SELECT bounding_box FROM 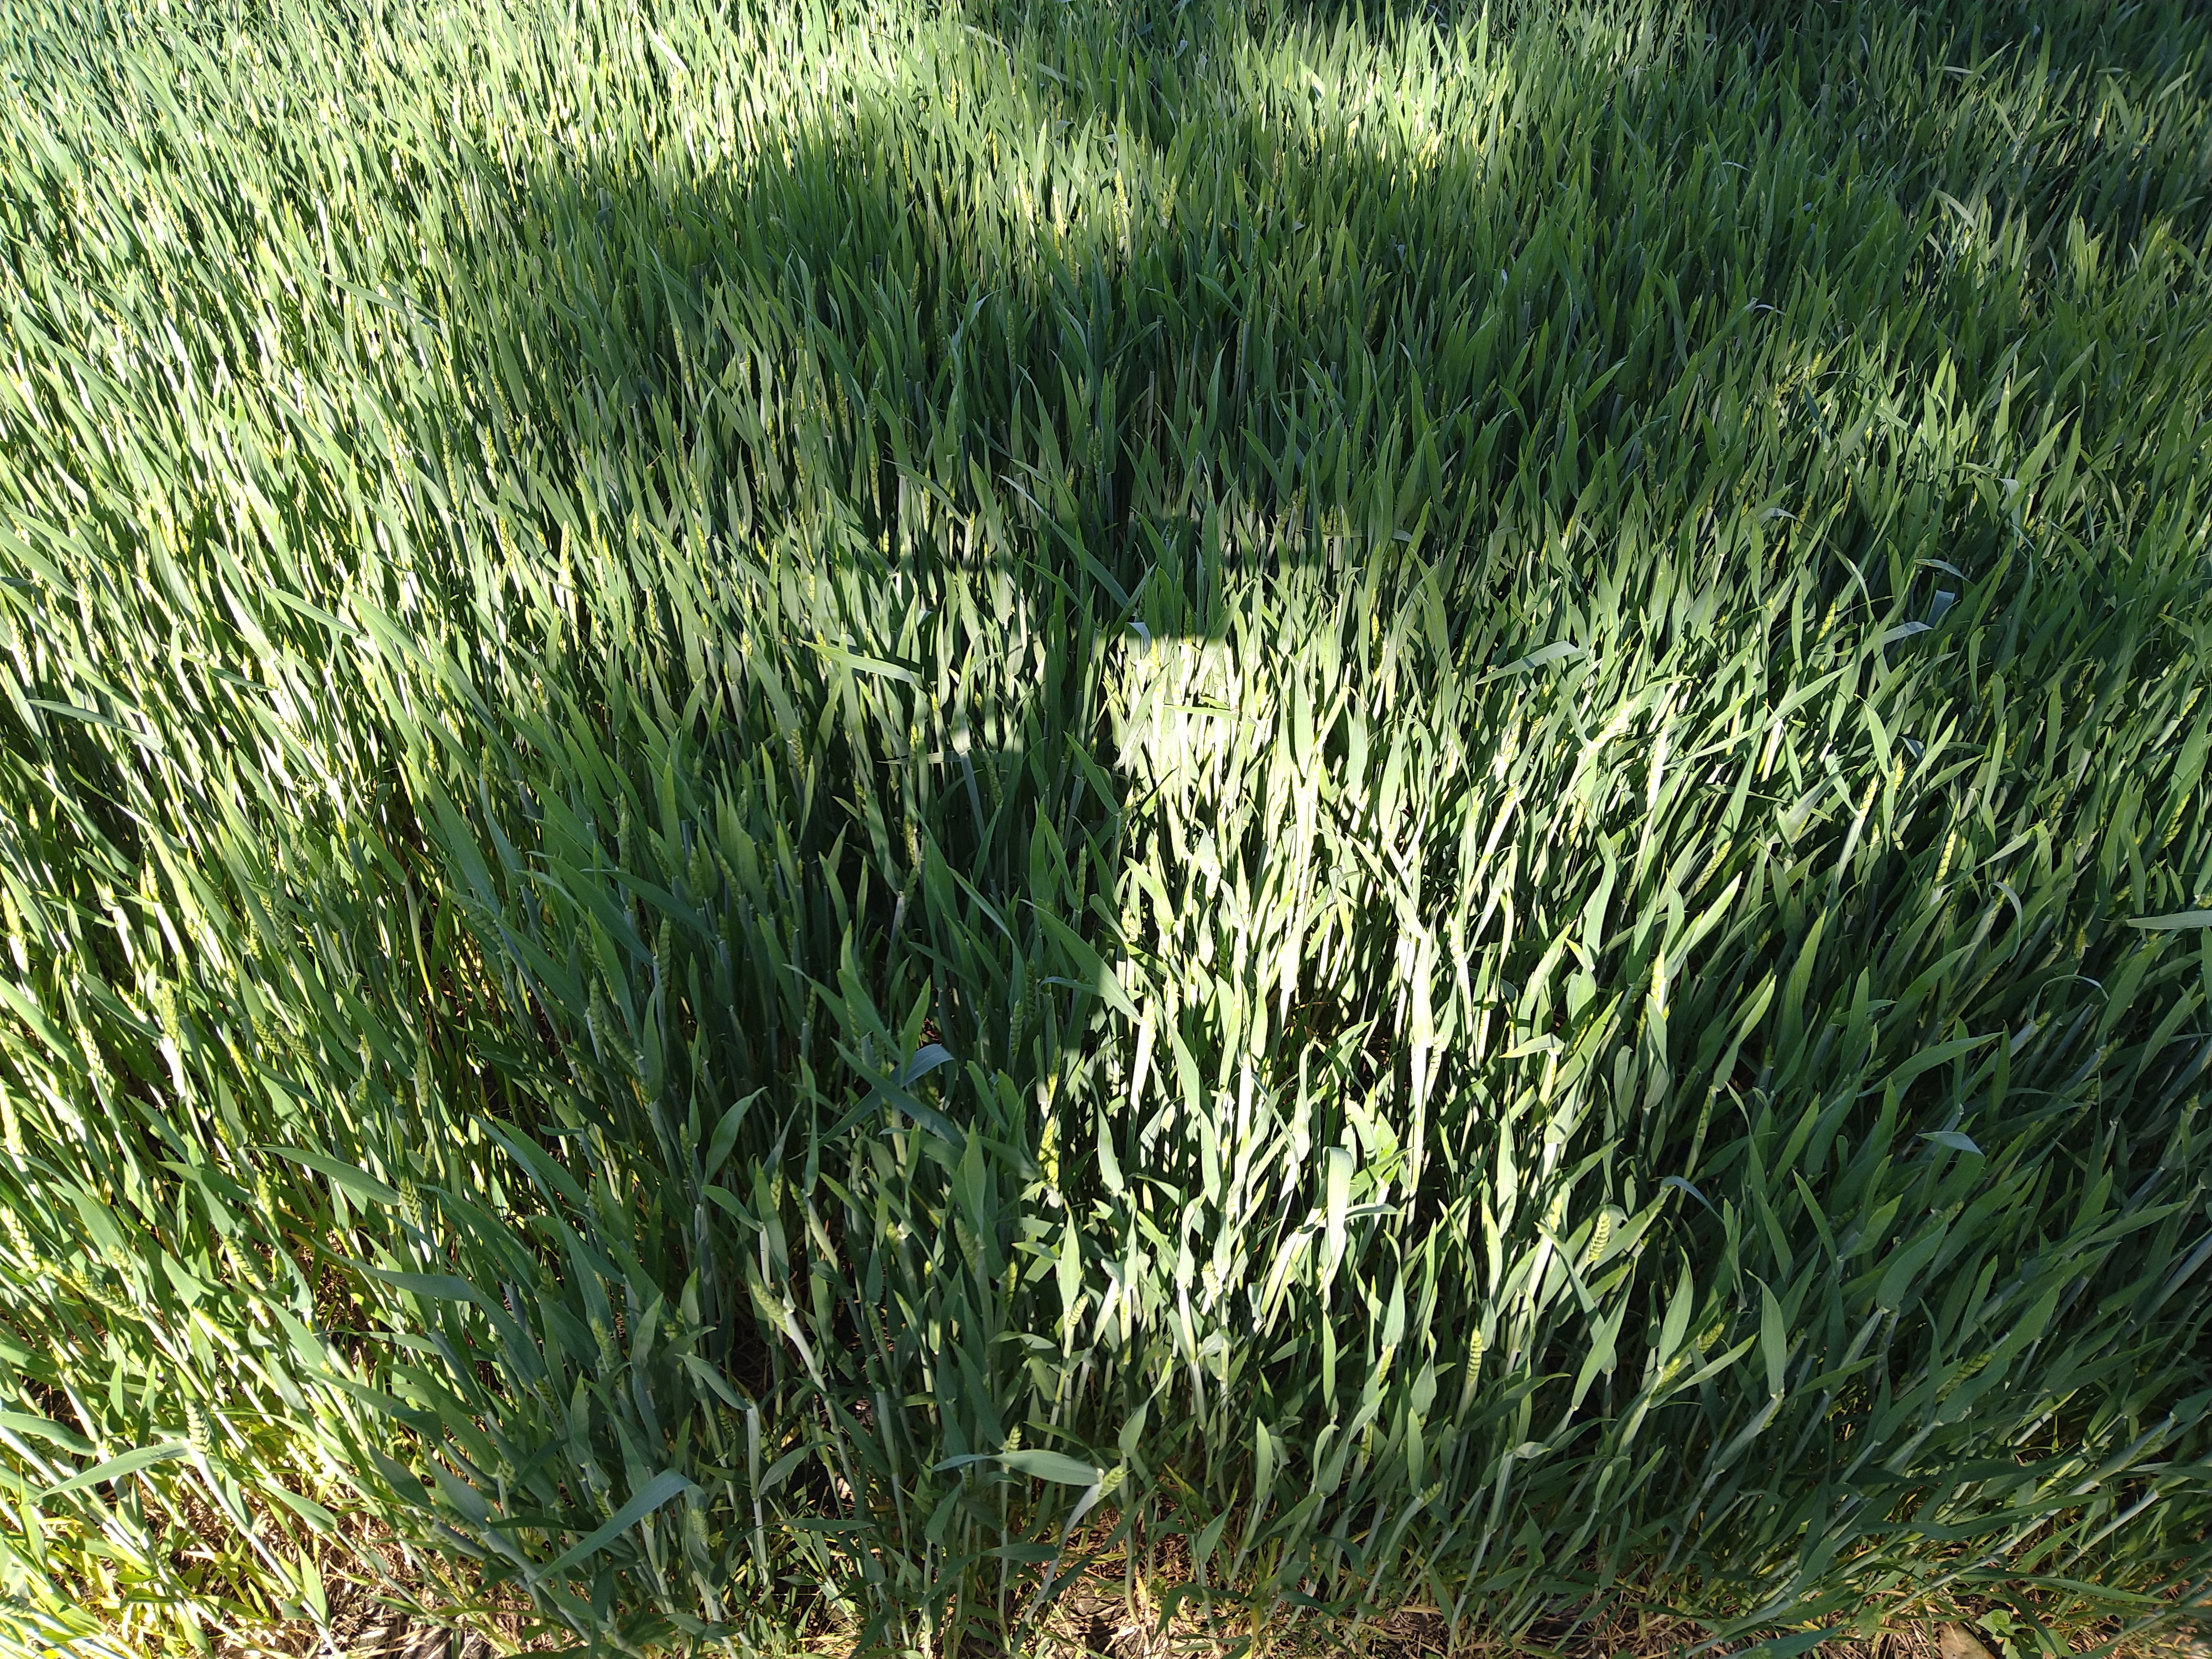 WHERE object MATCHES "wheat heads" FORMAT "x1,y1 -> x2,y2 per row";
1371,612 -> 1383,671
593,1489 -> 615,1523
1247,283 -> 1254,324
164,200 -> 189,247
1170,332 -> 1177,366
803,984 -> 816,1030
554,113 -> 561,125
24,795 -> 42,845
1731,296 -> 1736,308
729,580 -> 740,600
1203,34 -> 1209,51
2029,1120 -> 2036,1130
323,736 -> 337,779
792,730 -> 805,782
299,1433 -> 314,1452
703,570 -> 711,596
1740,495 -> 1754,518
2133,129 -> 2152,154
1080,289 -> 1084,303
634,283 -> 644,310
1591,695 -> 1639,754
557,635 -> 565,662
1314,1266 -> 1325,1306
264,449 -> 273,465
953,1217 -> 978,1277
1121,904 -> 1130,931
1640,1225 -> 1660,1245
1307,124 -> 1315,153
1719,108 -> 1728,136
1054,225 -> 1060,261
1515,192 -> 1520,208
1486,90 -> 1494,106
1201,510 -> 1207,564
266,840 -> 275,873
1567,804 -> 1582,847
254,215 -> 265,239
718,1406 -> 734,1440
590,513 -> 599,547
1056,101 -> 1063,121
1842,478 -> 1853,515
1393,395 -> 1405,415
483,963 -> 506,1001
63,425 -> 72,438
494,563 -> 502,591
333,857 -> 344,898
1419,1482 -> 1441,1506
2,888 -> 27,955
1953,523 -> 1973,556
807,545 -> 814,566
907,823 -> 919,863
1473,123 -> 1477,142
358,474 -> 367,490
1319,676 -> 1323,717
1438,478 -> 1452,503
1646,443 -> 1657,495
823,271 -> 832,294
250,99 -> 262,128
1772,367 -> 1802,405
259,894 -> 273,920
690,469 -> 703,506
436,682 -> 457,732
1503,711 -> 1524,766
315,653 -> 324,673
1275,793 -> 1289,823
2145,928 -> 2161,942
571,1039 -> 588,1085
480,746 -> 491,785
1872,797 -> 1887,845
679,230 -> 686,246
162,273 -> 171,308
30,535 -> 44,554
1362,1425 -> 1370,1465
592,943 -> 613,993
1277,147 -> 1283,178
2024,1011 -> 2049,1042
1461,1170 -> 1472,1194
1312,756 -> 1324,789
1937,829 -> 1952,883
1446,78 -> 1449,92
752,1281 -> 788,1333
136,547 -> 150,589
866,365 -> 884,427
395,1080 -> 406,1116
492,126 -> 503,146
408,222 -> 416,250
359,1034 -> 371,1062
1974,690 -> 1996,741
876,1062 -> 891,1125
757,539 -> 766,561
1119,791 -> 1135,838
1589,104 -> 1592,116
1442,204 -> 1451,254
1922,1201 -> 1965,1239
990,270 -> 998,292
320,867 -> 341,916
1255,386 -> 1259,399
255,1172 -> 276,1227
294,327 -> 303,367
900,542 -> 906,562
1012,77 -> 1017,95
1972,671 -> 1998,711
1759,273 -> 1765,289
696,524 -> 709,558
1881,1309 -> 1895,1339
184,327 -> 191,349
56,87 -> 66,115
2180,691 -> 2199,715
629,624 -> 635,648
690,757 -> 702,800
1201,348 -> 1211,381
814,376 -> 823,392
544,213 -> 550,230
492,372 -> 501,392
599,431 -> 615,458
984,542 -> 988,556
399,32 -> 408,55
510,102 -> 525,137
611,597 -> 622,623
1648,371 -> 1652,387
1507,243 -> 1514,256
832,370 -> 850,427
1507,1021 -> 1515,1050
1543,394 -> 1559,438
437,285 -> 448,327
921,340 -> 925,367
2073,835 -> 2081,850
1236,318 -> 1244,369
8,616 -> 34,680
1044,280 -> 1052,297
364,42 -> 374,74
320,1361 -> 347,1402
486,428 -> 494,467
1682,0 -> 1690,15
100,301 -> 129,335
1129,264 -> 1135,282
985,391 -> 1003,442
1736,467 -> 1751,495
1218,941 -> 1228,977
1297,207 -> 1305,222
644,1509 -> 653,1527
276,1020 -> 313,1063
924,1068 -> 940,1094
348,183 -> 361,226
649,836 -> 675,893
620,792 -> 626,820
1695,1087 -> 1717,1140
546,102 -> 557,134
1082,435 -> 1094,479
627,887 -> 640,931
728,105 -> 736,143
871,1030 -> 883,1072
1217,562 -> 1223,581
195,1306 -> 231,1345
59,192 -> 69,211
818,631 -> 830,666
836,553 -> 841,577
1038,1115 -> 1056,1166
1664,118 -> 1671,146
1432,299 -> 1436,313
95,638 -> 131,687
691,1509 -> 709,1541
138,701 -> 151,725
1821,1007 -> 1842,1036
1762,1042 -> 1774,1068
982,749 -> 1003,806
679,1121 -> 694,1171
1137,582 -> 1148,624
1807,350 -> 1822,380
778,206 -> 789,245
1061,730 -> 1076,769
815,229 -> 823,255
1291,764 -> 1303,822
657,1312 -> 679,1342
310,1012 -> 319,1037
924,468 -> 929,518
1057,798 -> 1066,842
660,547 -> 666,565
2010,162 -> 2018,185
1100,110 -> 1108,132
265,669 -> 287,701
1785,250 -> 1802,304
1516,201 -> 1531,240
2106,209 -> 2116,232
531,867 -> 546,901
253,1011 -> 276,1052
127,778 -> 159,824
1560,385 -> 1567,420
127,82 -> 139,108
128,122 -> 138,146
793,448 -> 806,485
935,226 -> 941,251
1094,429 -> 1105,487
1841,1058 -> 1885,1092
109,1244 -> 137,1287
385,420 -> 403,483
983,1375 -> 992,1401
557,257 -> 575,309
1048,1045 -> 1060,1096
1131,916 -> 1137,948
397,1173 -> 419,1224
865,1306 -> 880,1340
1027,959 -> 1037,1021
937,170 -> 945,200
692,177 -> 697,196
1741,403 -> 1753,428
1642,404 -> 1652,428
1238,164 -> 1242,176
103,1435 -> 117,1458
1721,512 -> 1729,532
313,892 -> 327,924
1419,129 -> 1436,161
1767,818 -> 1779,841
1708,486 -> 1715,509
721,560 -> 730,577
1563,515 -> 1574,542
573,476 -> 584,494
1252,232 -> 1259,277
249,560 -> 258,584
869,269 -> 878,298
297,493 -> 307,515
1077,846 -> 1085,913
738,521 -> 744,541
1324,503 -> 1333,535
536,684 -> 546,700
557,520 -> 569,578
717,323 -> 722,349
111,168 -> 129,207
1686,213 -> 1690,239
500,393 -> 516,456
1893,339 -> 1902,362
1201,1262 -> 1219,1300
301,798 -> 310,831
1220,1134 -> 1231,1190
445,889 -> 506,951
1551,1061 -> 1557,1083
1005,1260 -> 1017,1306
2018,515 -> 2034,547
781,637 -> 793,667
1334,510 -> 1338,530
1693,839 -> 1731,895
318,524 -> 335,561
1199,317 -> 1206,329
1277,489 -> 1297,528
949,489 -> 956,529
882,528 -> 889,555
777,276 -> 784,301
846,1000 -> 862,1056
1121,1298 -> 1130,1326
2171,263 -> 2174,278
1784,433 -> 1791,449
1635,1004 -> 1649,1045
617,738 -> 624,766
502,953 -> 510,973
1747,929 -> 1770,961
2048,777 -> 2073,818
988,127 -> 992,140
505,332 -> 527,383
2135,834 -> 2141,844
1081,736 -> 1097,782
5,323 -> 19,349
590,977 -> 601,1045
389,165 -> 398,196
1350,98 -> 1359,137
0,162 -> 8,178
2003,726 -> 2028,758
1569,111 -> 1581,151
28,102 -> 39,124
1583,198 -> 1597,232
685,862 -> 698,902
2176,258 -> 2185,275
729,253 -> 737,281
923,1261 -> 933,1293
1182,317 -> 1193,355
274,442 -> 283,468
545,390 -> 559,423
1991,876 -> 2009,918
364,464 -> 375,486
212,1113 -> 237,1160
1304,295 -> 1312,330
1169,447 -> 1180,491
73,1267 -> 142,1322
117,986 -> 144,1021
537,524 -> 545,547
1909,540 -> 1926,592
1381,818 -> 1398,855
1169,506 -> 1176,539
586,1176 -> 604,1224
705,272 -> 709,284
502,1455 -> 517,1489
252,298 -> 258,309
868,624 -> 871,643
1225,1190 -> 1240,1225
1650,1356 -> 1683,1396
664,315 -> 672,346
67,948 -> 83,977
1114,170 -> 1125,215
79,1025 -> 108,1082
1217,265 -> 1226,287
993,134 -> 999,171
766,30 -> 774,53
289,821 -> 308,892
2075,924 -> 2084,952
1399,456 -> 1414,475
1349,404 -> 1360,436
208,468 -> 217,500
187,267 -> 199,302
1680,1065 -> 1699,1100
746,100 -> 760,153
616,283 -> 628,326
615,163 -> 623,188
2100,1122 -> 2117,1162
743,351 -> 751,390
911,261 -> 920,310
1969,433 -> 1978,454
187,488 -> 203,544
578,353 -> 592,400
1590,1210 -> 1611,1261
2088,1036 -> 2117,1077
1182,604 -> 1193,647
1674,487 -> 1683,514
1167,176 -> 1175,220
277,342 -> 288,367
1892,757 -> 1907,788
360,175 -> 367,210
189,577 -> 201,602
766,417 -> 778,461
581,440 -> 592,467
144,854 -> 158,900
867,643 -> 873,657
188,1399 -> 208,1455
958,78 -> 962,91
2170,1094 -> 2197,1147
1424,698 -> 1436,724
1036,198 -> 1040,224
671,419 -> 684,469
1029,192 -> 1034,206
1434,550 -> 1439,566
1410,170 -> 1416,203
454,182 -> 470,228
1766,1397 -> 1784,1431
1113,199 -> 1121,238
1315,274 -> 1322,315
427,742 -> 439,775
524,192 -> 536,231
1474,377 -> 1496,423
224,959 -> 247,1009
245,294 -> 255,315
302,451 -> 323,493
1148,634 -> 1161,698
103,559 -> 120,587
0,1081 -> 24,1152
1106,324 -> 1114,359
423,1140 -> 437,1205
1648,727 -> 1668,795
1360,779 -> 1371,804
1525,268 -> 1532,300
629,149 -> 635,175
2183,150 -> 2194,172
359,1075 -> 368,1107
1616,721 -> 1625,747
32,1431 -> 56,1459
406,152 -> 412,171
588,605 -> 597,632
688,1041 -> 704,1078
1592,332 -> 1599,354
203,866 -> 227,910
42,1254 -> 80,1295
358,899 -> 372,943
364,23 -> 376,54
718,912 -> 730,951
196,91 -> 203,112
770,1172 -> 782,1206
804,349 -> 808,368
1436,297 -> 1440,311
1786,1326 -> 1805,1358
14,531 -> 26,572
939,287 -> 944,306
242,645 -> 253,681
417,268 -> 435,310
166,508 -> 176,556
315,74 -> 320,93
2150,369 -> 2164,395
440,77 -> 444,84
694,347 -> 700,363
657,231 -> 665,261
365,995 -> 375,1017
691,844 -> 702,876
499,516 -> 516,570
76,164 -> 87,199
170,175 -> 192,209
1202,207 -> 1212,240
648,586 -> 660,634
555,1496 -> 573,1529
812,279 -> 816,299
538,1265 -> 557,1302
968,511 -> 975,545
1428,1033 -> 1441,1079
1818,600 -> 1835,642
32,567 -> 43,585
1869,120 -> 1874,134
182,917 -> 199,941
1200,237 -> 1206,263
903,167 -> 913,191
1895,918 -> 1908,948
1467,1330 -> 1485,1384
1321,1193 -> 1328,1216
434,332 -> 447,361
2127,484 -> 2142,516
463,372 -> 476,404
1007,1423 -> 1021,1456
603,114 -> 609,129
1320,510 -> 1324,534
1701,246 -> 1710,285
1162,191 -> 1166,217
1569,1010 -> 1594,1052
1455,633 -> 1471,669
2196,891 -> 2212,909
573,129 -> 583,153
906,412 -> 913,452
1932,1349 -> 1992,1399
1498,111 -> 1504,139
497,150 -> 502,165
1759,190 -> 1766,230
143,170 -> 159,207
1006,310 -> 1017,378
2108,884 -> 2134,907
1477,170 -> 1481,180
1047,1149 -> 1058,1185
1478,996 -> 1488,1046
1870,1190 -> 1889,1218
651,134 -> 657,161
1690,296 -> 1702,339
403,648 -> 421,697
160,978 -> 181,1051
141,653 -> 160,699
950,76 -> 957,116
643,126 -> 649,143
1559,3 -> 1566,25
427,93 -> 435,113
2040,119 -> 2047,133
639,651 -> 647,693
588,1317 -> 623,1388
1910,119 -> 1919,142
1767,597 -> 1772,608
1618,201 -> 1629,237
398,145 -> 405,164
1554,721 -> 1569,757
1859,773 -> 1877,809
1078,374 -> 1085,407
1728,336 -> 1732,348
1531,685 -> 1550,733
2139,212 -> 2148,238
814,391 -> 822,413
576,927 -> 598,970
1625,959 -> 1656,1011
631,511 -> 640,538
1540,532 -> 1548,563
1208,862 -> 1220,899
544,924 -> 568,963
1651,952 -> 1663,1006
1547,1191 -> 1563,1231
601,536 -> 612,572
0,786 -> 12,810
907,723 -> 917,788
2162,821 -> 2182,849
2073,653 -> 2094,696
79,555 -> 95,621
1645,238 -> 1652,256
415,1036 -> 428,1105
1760,238 -> 1768,255
1088,301 -> 1094,348
635,406 -> 641,426
657,918 -> 670,991
1480,137 -> 1485,154
1130,406 -> 1135,445
1055,289 -> 1064,305
335,817 -> 353,851
796,857 -> 803,876
674,67 -> 679,104
2037,523 -> 2044,541
662,329 -> 669,361
154,475 -> 169,513
1100,254 -> 1108,284
618,816 -> 630,873
1016,172 -> 1029,217
1578,284 -> 1587,306
370,204 -> 381,228
851,775 -> 867,800
2128,1425 -> 2167,1471
701,611 -> 706,628
1067,467 -> 1073,489
275,896 -> 288,953
0,1207 -> 40,1272
1532,339 -> 1538,366
605,1023 -> 638,1071
1249,492 -> 1255,514
1510,1295 -> 1516,1312
983,339 -> 995,391
764,877 -> 769,891
587,263 -> 600,305
1482,181 -> 1486,212
962,1464 -> 973,1491
975,692 -> 983,710
1624,635 -> 1630,652
503,197 -> 512,218
2100,100 -> 2107,123
185,79 -> 192,99
47,590 -> 69,622
808,575 -> 816,601
1402,1416 -> 1426,1450
225,101 -> 235,127
1087,285 -> 1092,295
1378,543 -> 1394,587
1630,1401 -> 1644,1424
714,849 -> 741,905
902,138 -> 911,173
324,165 -> 330,187
242,30 -> 256,65
601,330 -> 612,368
63,434 -> 70,458
60,218 -> 71,251
515,427 -> 520,442
64,553 -> 78,580
1831,1207 -> 1856,1237
237,351 -> 257,388
784,914 -> 794,953
1440,389 -> 1447,428
1010,997 -> 1024,1058
2061,394 -> 2073,414
1753,128 -> 1767,157
675,328 -> 691,384
1973,489 -> 1978,506
1366,238 -> 1375,263
1495,785 -> 1517,826
179,526 -> 194,563
1694,1320 -> 1722,1357
2160,791 -> 2190,847
1112,352 -> 1123,384
1768,534 -> 1785,566
1793,816 -> 1807,843
341,98 -> 345,114
738,791 -> 747,826
2095,805 -> 2107,836
1320,126 -> 1325,148
423,595 -> 436,622
779,362 -> 785,382
901,869 -> 919,919
724,660 -> 730,684
1216,340 -> 1223,355
106,59 -> 119,88
782,129 -> 791,169
1447,915 -> 1460,967
934,308 -> 944,363
223,1235 -> 256,1284
1667,522 -> 1676,536
1347,443 -> 1352,458
231,477 -> 262,527
1788,338 -> 1795,355
1714,607 -> 1728,635
1180,287 -> 1190,306
150,585 -> 175,623
1046,899 -> 1054,918
1364,299 -> 1378,341
1068,1295 -> 1087,1331
899,398 -> 905,426
249,930 -> 264,962
369,681 -> 385,719
1296,484 -> 1307,510
1696,506 -> 1704,523
2071,1083 -> 2098,1127
1658,163 -> 1671,209
330,1224 -> 358,1260
787,1181 -> 811,1224
1462,293 -> 1468,311
949,357 -> 957,389
2018,289 -> 2032,317
758,841 -> 778,886
444,433 -> 459,510
750,25 -> 754,47
668,194 -> 679,227
639,1075 -> 652,1115
883,1215 -> 899,1256
538,1379 -> 564,1431
276,714 -> 315,758
1431,132 -> 1442,156
800,391 -> 804,411
1980,959 -> 2001,988
310,232 -> 319,263
1873,932 -> 1889,954
869,451 -> 878,504
441,620 -> 450,651
71,183 -> 78,201
1795,493 -> 1812,536
491,1333 -> 508,1365
1270,185 -> 1274,207
1459,472 -> 1465,495
1098,1465 -> 1126,1498
488,762 -> 521,798
354,307 -> 367,339
635,329 -> 651,373
1144,996 -> 1156,1042
1866,426 -> 1872,440
997,27 -> 1001,41
1377,1343 -> 1393,1382
1067,244 -> 1077,286
0,1595 -> 38,1620
1736,169 -> 1757,226
433,1502 -> 477,1533
171,310 -> 183,336
468,96 -> 478,127
742,629 -> 752,658
228,1039 -> 252,1078
932,692 -> 940,716
824,404 -> 832,428
146,246 -> 161,280
393,320 -> 404,338
1938,877 -> 1966,932
262,619 -> 276,647
1354,178 -> 1357,201
1420,249 -> 1430,280
745,584 -> 753,609
740,104 -> 749,137
1495,301 -> 1503,339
